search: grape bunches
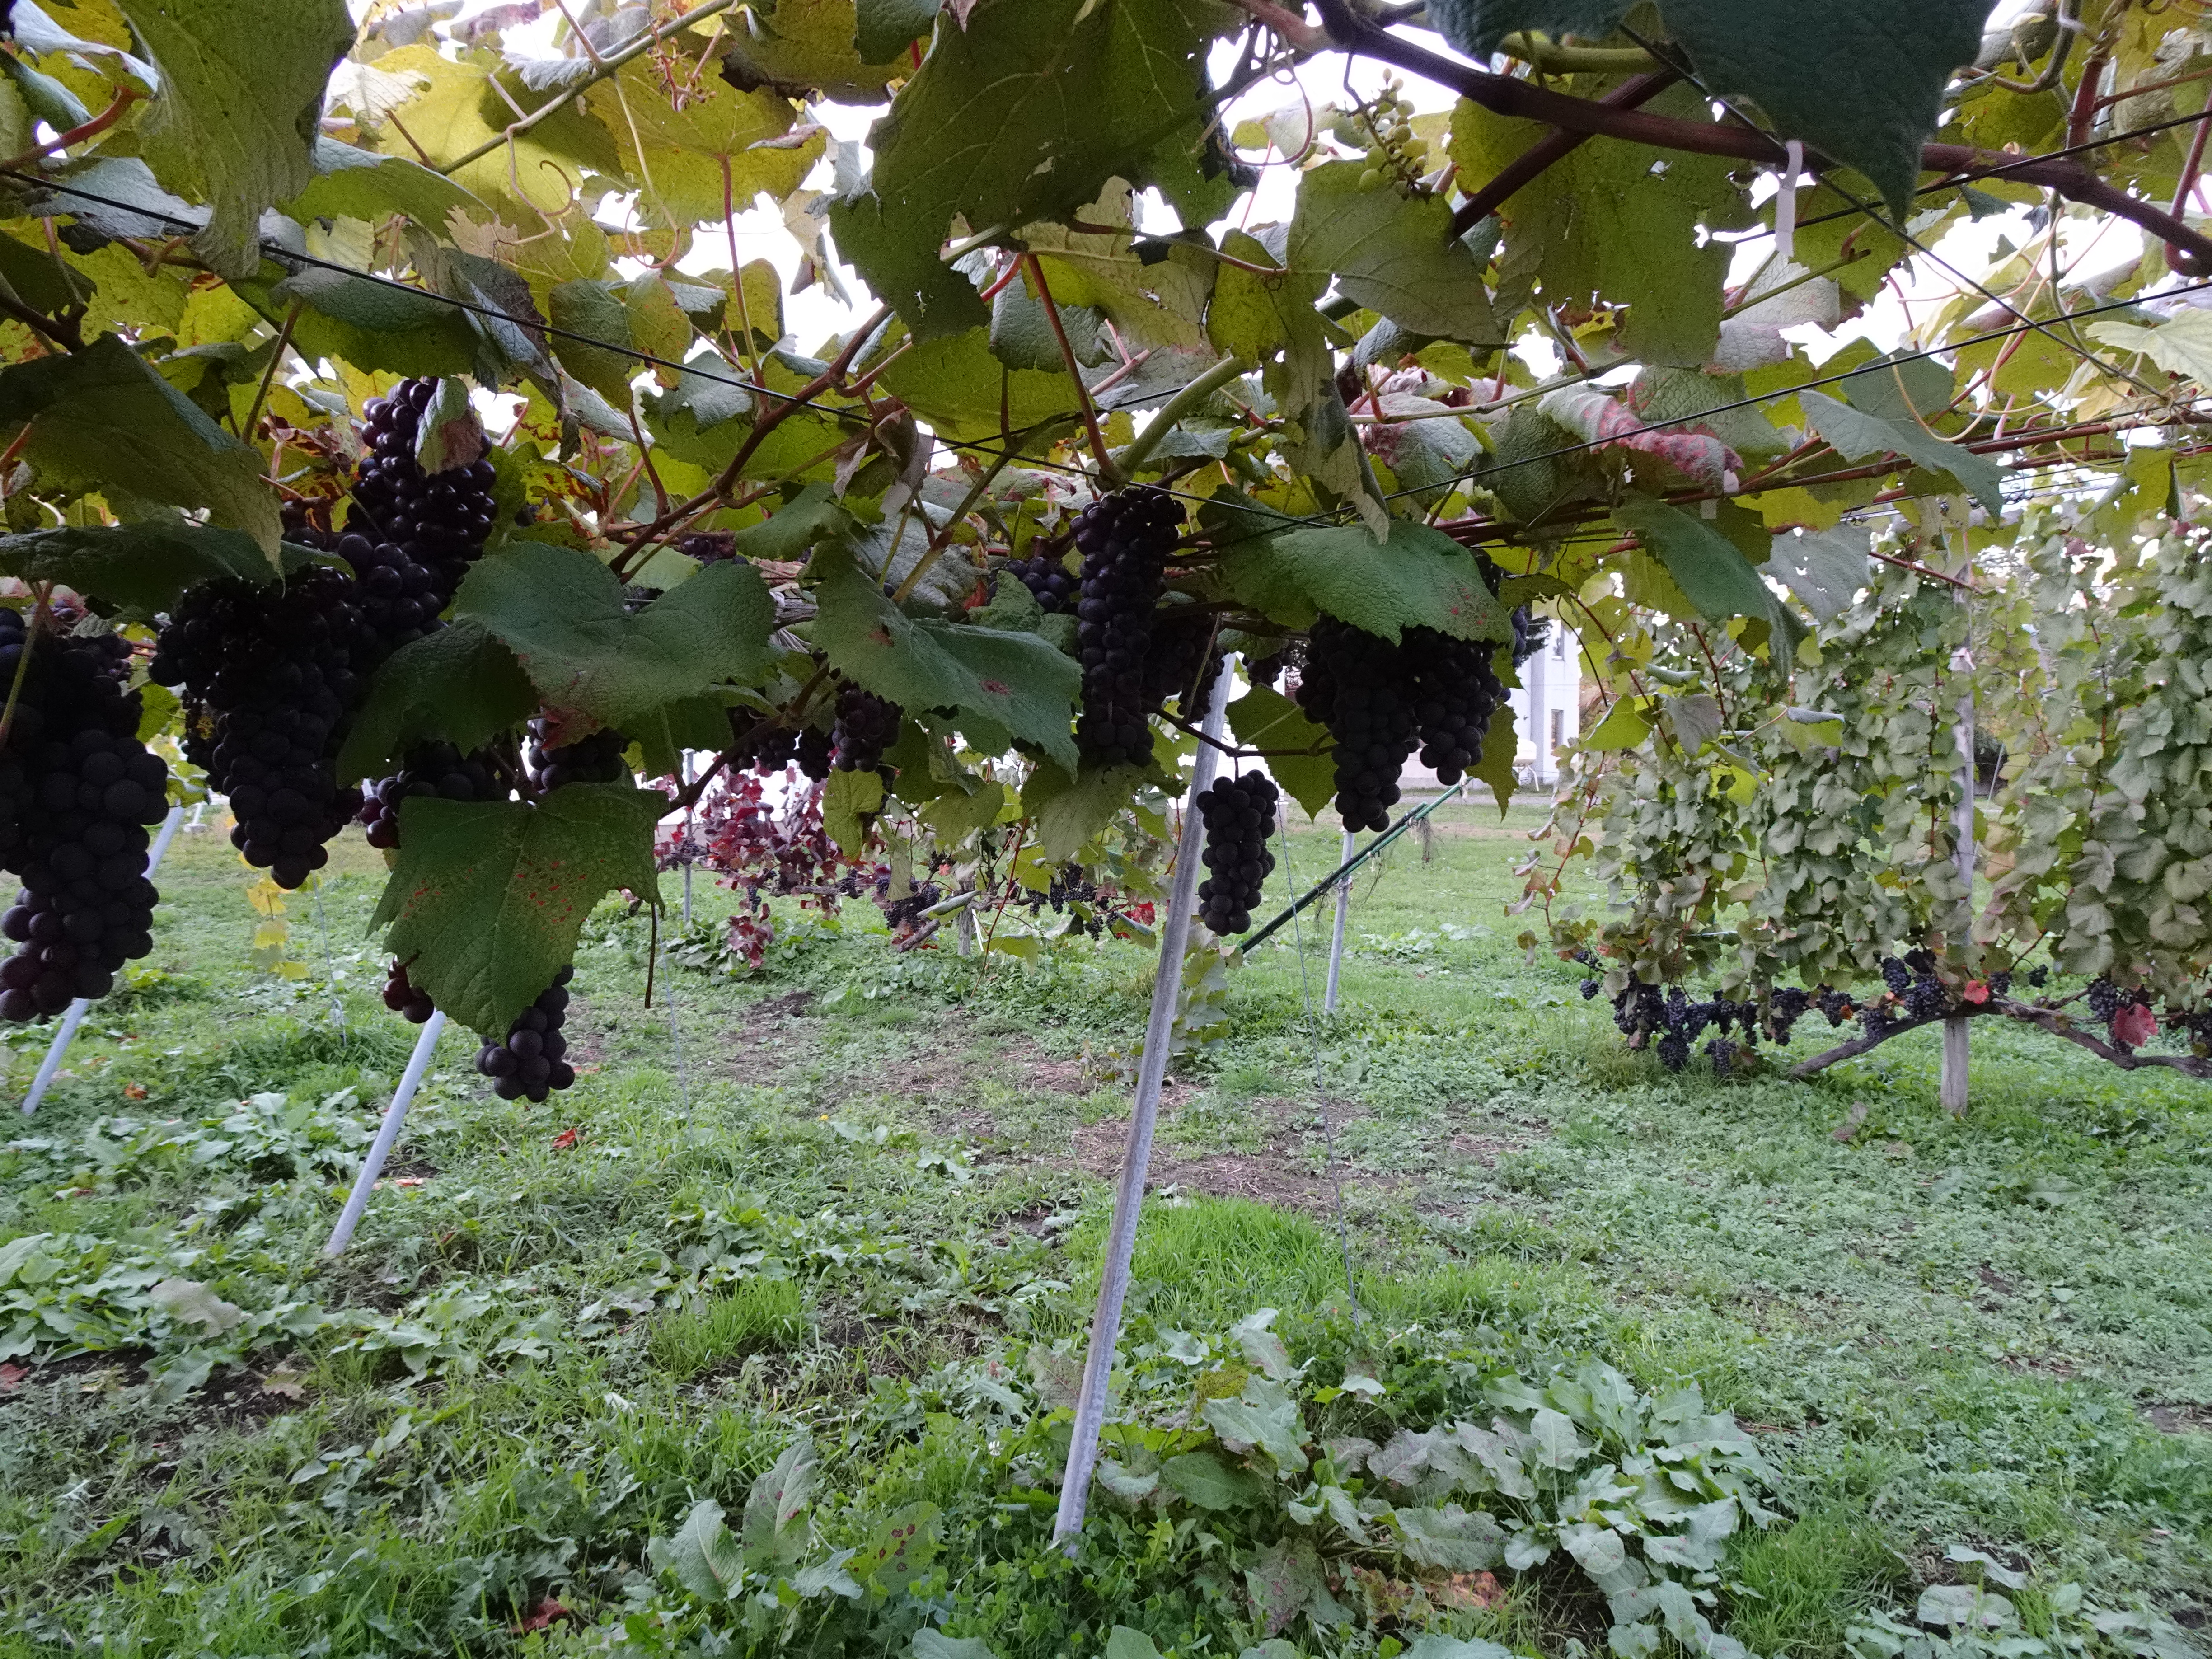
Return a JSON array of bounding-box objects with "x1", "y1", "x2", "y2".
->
[
  {"x1": 1481, "y1": 564, "x2": 1511, "y2": 598},
  {"x1": 395, "y1": 742, "x2": 511, "y2": 804},
  {"x1": 148, "y1": 562, "x2": 376, "y2": 890},
  {"x1": 1010, "y1": 736, "x2": 1051, "y2": 755},
  {"x1": 471, "y1": 969, "x2": 583, "y2": 1106},
  {"x1": 0, "y1": 606, "x2": 140, "y2": 747},
  {"x1": 1080, "y1": 556, "x2": 1154, "y2": 766},
  {"x1": 1510, "y1": 603, "x2": 1528, "y2": 667},
  {"x1": 0, "y1": 886, "x2": 114, "y2": 1023},
  {"x1": 276, "y1": 509, "x2": 445, "y2": 665},
  {"x1": 1142, "y1": 611, "x2": 1226, "y2": 713},
  {"x1": 1049, "y1": 861, "x2": 1094, "y2": 915},
  {"x1": 344, "y1": 375, "x2": 497, "y2": 594},
  {"x1": 922, "y1": 705, "x2": 959, "y2": 720},
  {"x1": 1414, "y1": 625, "x2": 1511, "y2": 785},
  {"x1": 1068, "y1": 483, "x2": 1189, "y2": 593},
  {"x1": 1240, "y1": 639, "x2": 1297, "y2": 688},
  {"x1": 1295, "y1": 615, "x2": 1355, "y2": 729},
  {"x1": 1356, "y1": 66, "x2": 1430, "y2": 211},
  {"x1": 831, "y1": 679, "x2": 905, "y2": 772},
  {"x1": 527, "y1": 716, "x2": 631, "y2": 796},
  {"x1": 1, "y1": 733, "x2": 167, "y2": 972},
  {"x1": 988, "y1": 556, "x2": 1072, "y2": 615},
  {"x1": 362, "y1": 777, "x2": 449, "y2": 1023},
  {"x1": 1196, "y1": 769, "x2": 1279, "y2": 936},
  {"x1": 1321, "y1": 618, "x2": 1419, "y2": 832}
]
